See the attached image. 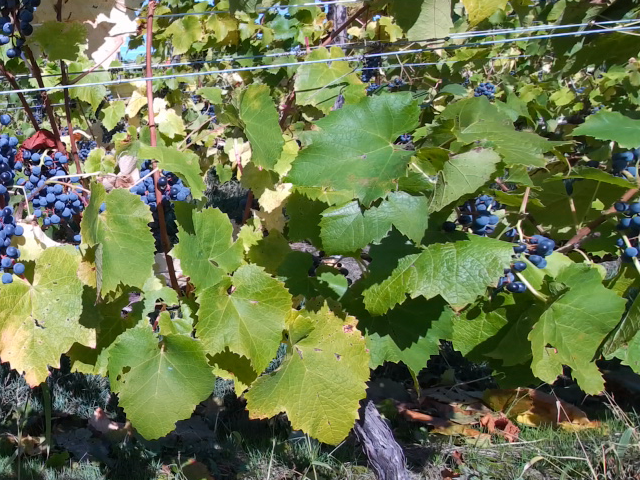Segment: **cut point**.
<instances>
[{
  "instance_id": "1",
  "label": "cut point",
  "mask_w": 640,
  "mask_h": 480,
  "mask_svg": "<svg viewBox=\"0 0 640 480\" xmlns=\"http://www.w3.org/2000/svg\"><path fill=\"white\" fill-rule=\"evenodd\" d=\"M524 220V217H521L518 219V221L515 224V229L518 231L519 235L524 236V232L520 227V223Z\"/></svg>"
}]
</instances>
